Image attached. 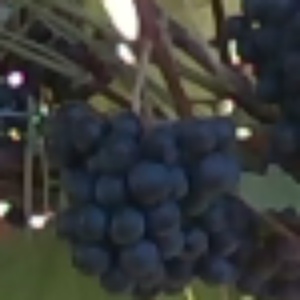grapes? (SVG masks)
<instances>
[{"label":"grapes","instance_id":"1","mask_svg":"<svg viewBox=\"0 0 300 300\" xmlns=\"http://www.w3.org/2000/svg\"><path fill=\"white\" fill-rule=\"evenodd\" d=\"M46 153L74 200L56 217L71 267L124 300L232 281L255 253L254 212L233 194L245 162L226 115L107 121L87 102L47 120Z\"/></svg>","mask_w":300,"mask_h":300}]
</instances>
